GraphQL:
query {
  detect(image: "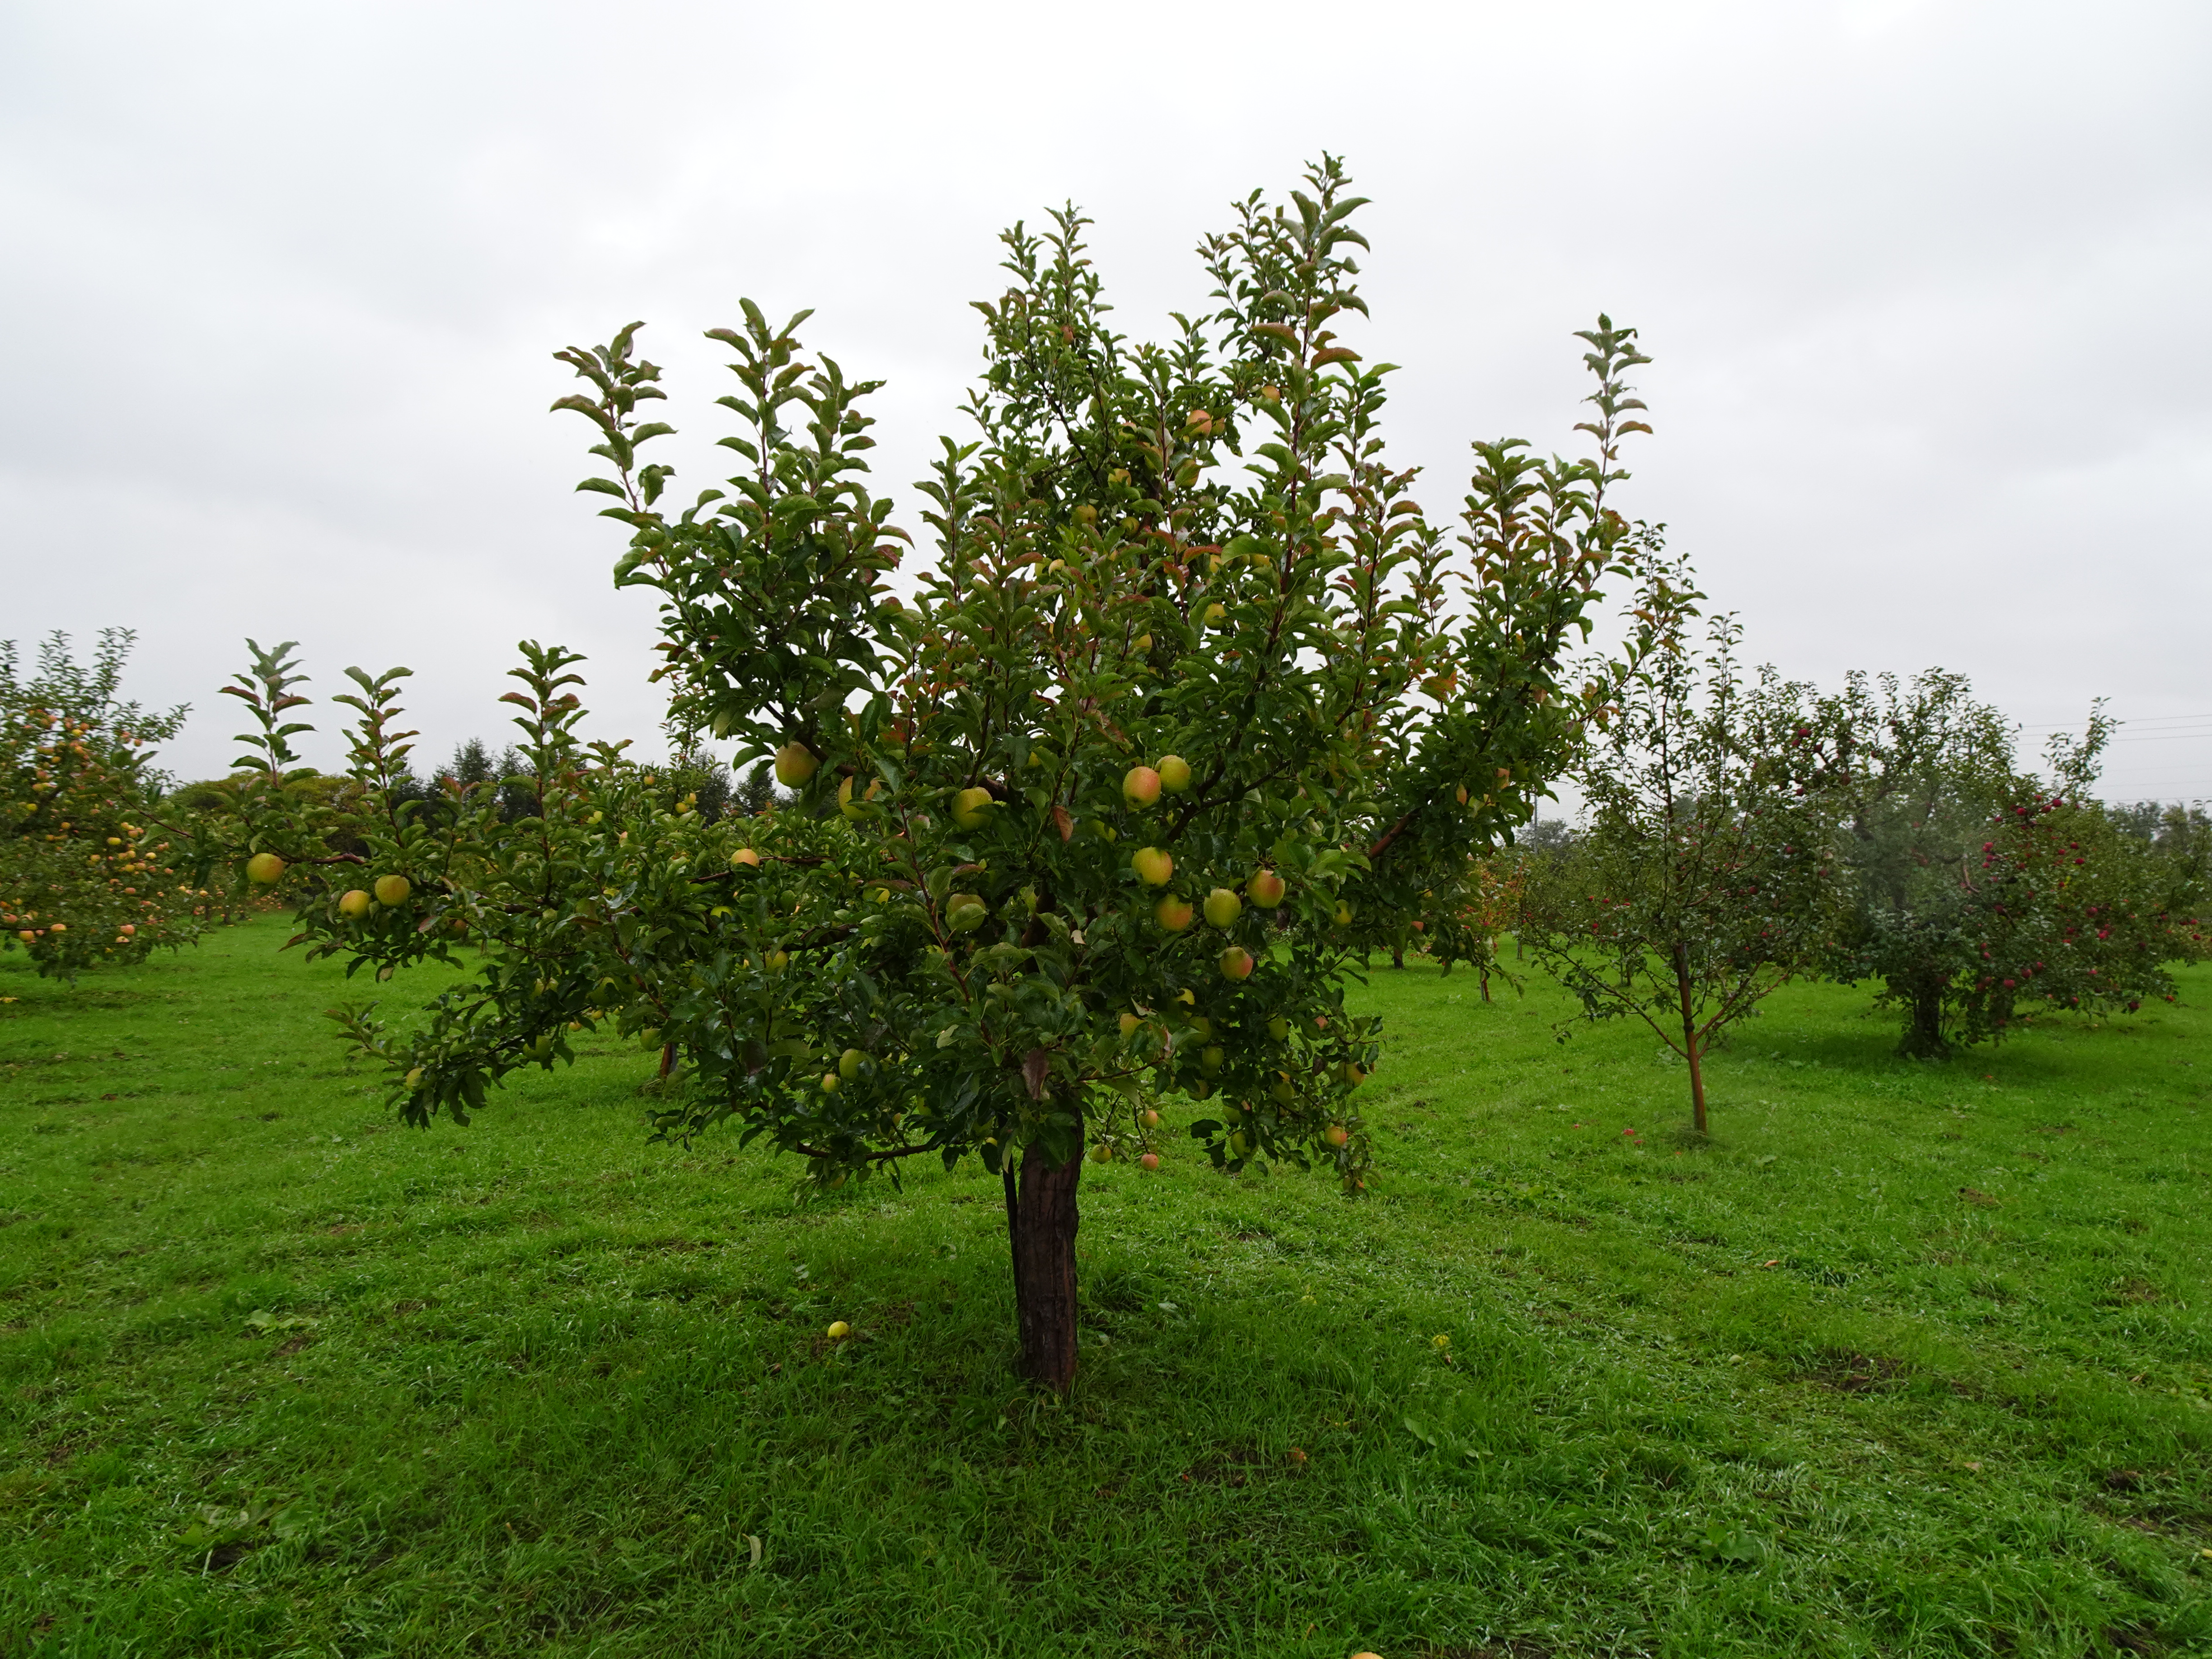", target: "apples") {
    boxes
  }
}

[727,845,761,879]
[909,813,932,834]
[1200,594,1232,631]
[1014,742,1044,769]
[915,1084,944,1117]
[1266,1062,1290,1085]
[584,807,609,831]
[1253,382,1288,412]
[742,957,756,971]
[1152,750,1197,793]
[589,978,620,1006]
[533,975,559,1001]
[1245,866,1292,911]
[1262,1012,1288,1041]
[1270,1081,1296,1105]
[909,1025,936,1052]
[1326,897,1362,929]
[1118,513,1139,537]
[437,911,468,943]
[1124,629,1152,658]
[1168,986,1195,1015]
[1089,1135,1115,1167]
[642,771,666,794]
[1313,1012,1333,1036]
[1200,1043,1231,1074]
[1119,1013,1152,1045]
[1070,499,1102,533]
[1457,937,1480,957]
[771,736,827,791]
[590,1004,606,1021]
[1336,1055,1369,1089]
[611,1004,631,1016]
[864,887,891,913]
[1317,1116,1350,1152]
[1200,549,1228,578]
[1103,462,1135,496]
[1342,1179,1364,1197]
[1125,839,1177,891]
[1407,915,1430,936]
[813,1159,847,1192]
[1141,664,1165,686]
[944,889,988,934]
[1118,761,1165,814]
[1149,887,1200,936]
[1343,840,1356,852]
[1035,556,1053,581]
[521,1032,555,1068]
[836,1043,880,1084]
[984,1137,998,1151]
[401,1063,437,1094]
[1243,543,1279,579]
[1466,794,1499,826]
[820,1072,849,1096]
[337,887,369,921]
[619,830,643,850]
[1229,1126,1263,1162]
[874,1119,899,1140]
[1115,421,1139,445]
[838,771,888,825]
[1222,1097,1252,1125]
[640,1027,664,1041]
[670,798,693,817]
[681,790,700,804]
[1184,1078,1210,1101]
[1140,1152,1163,1171]
[372,872,415,907]
[1135,1102,1162,1131]
[1217,943,1258,985]
[1184,402,1214,445]
[244,849,286,888]
[1145,445,1170,471]
[569,1019,584,1033]
[1165,1072,1183,1095]
[710,906,735,931]
[756,945,794,975]
[1089,816,1118,843]
[1049,557,1071,581]
[1203,886,1244,933]
[1438,781,1468,807]
[1423,885,1441,903]
[1165,806,1188,830]
[1185,1014,1212,1046]
[947,779,1001,834]
[792,902,807,914]
[877,1104,904,1130]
